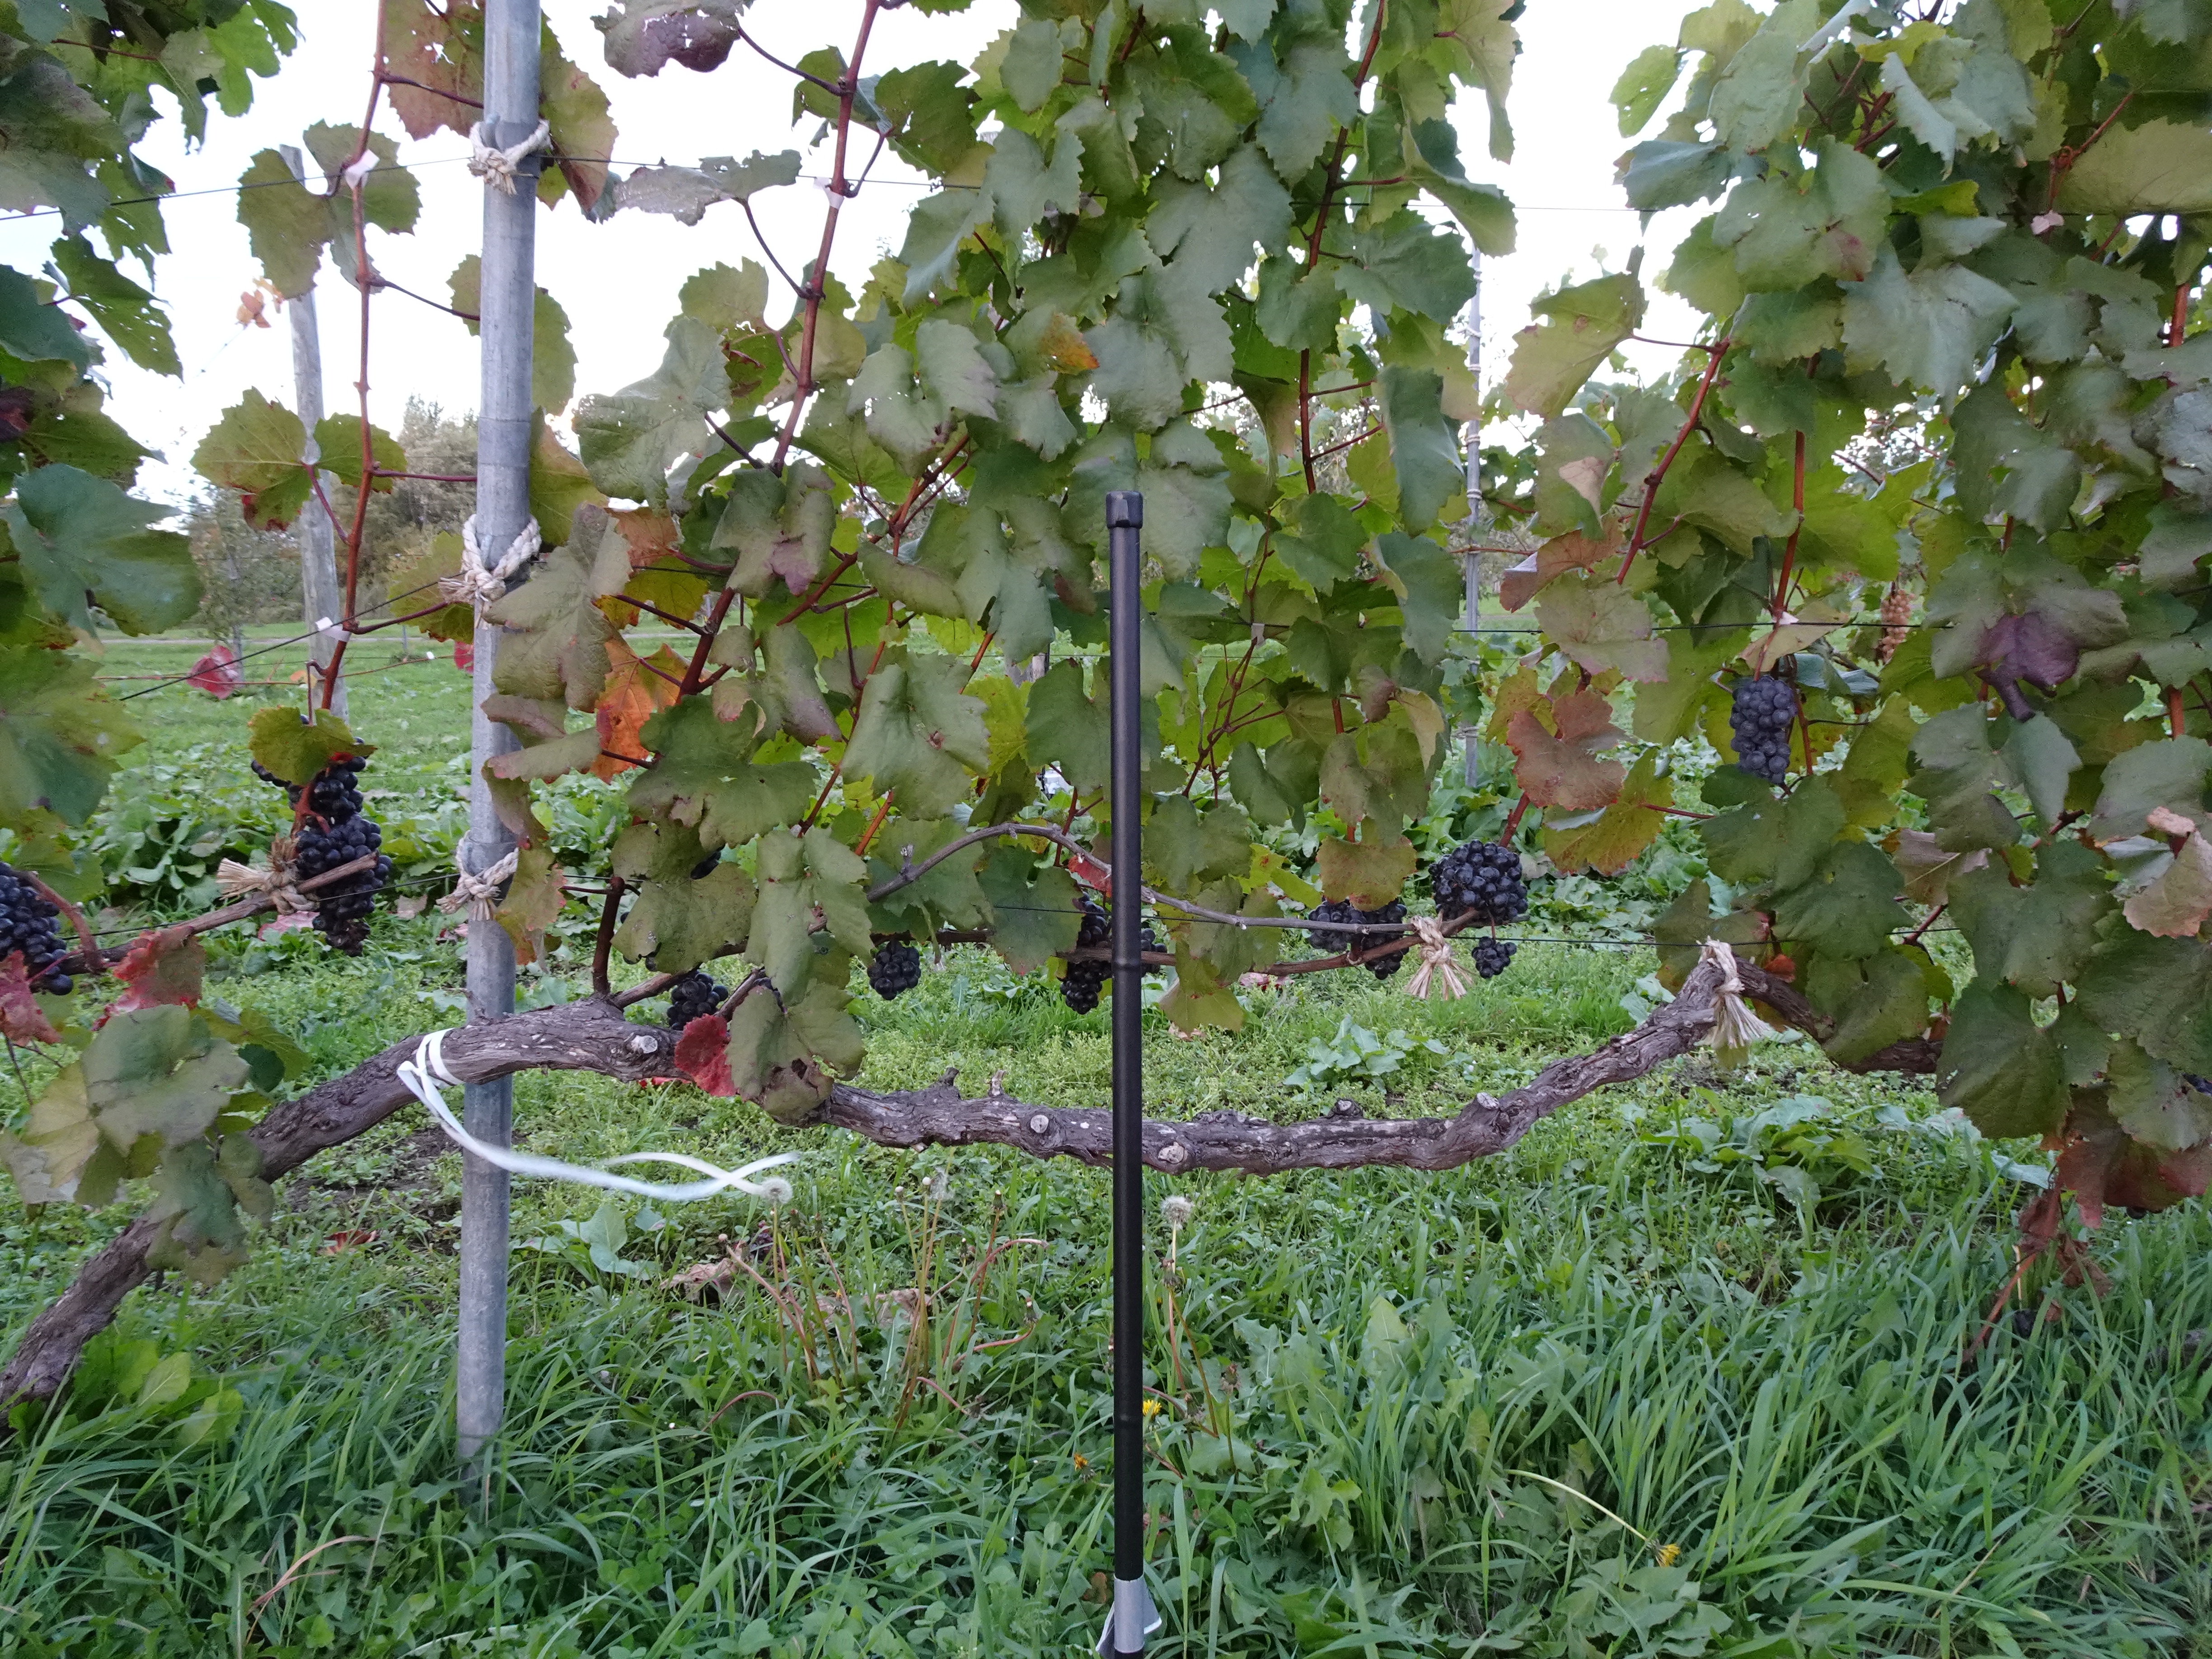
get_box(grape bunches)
[294,817,403,957]
[2,859,75,995]
[1876,587,1916,666]
[666,969,730,1033]
[618,909,664,974]
[2006,1280,2052,1341]
[1727,670,1800,792]
[249,715,371,824]
[1307,891,1350,955]
[1470,935,1521,981]
[549,845,589,872]
[2119,1182,2185,1227]
[2161,1047,2212,1116]
[1344,889,1410,980]
[1427,838,1530,930]
[864,937,924,1004]
[1132,912,1169,982]
[1052,898,1112,1017]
